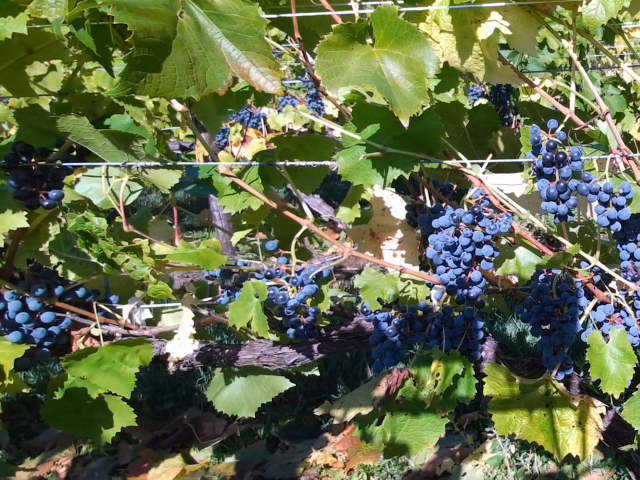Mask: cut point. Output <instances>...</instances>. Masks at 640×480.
<instances>
[{"mask_svg": "<svg viewBox=\"0 0 640 480\" xmlns=\"http://www.w3.org/2000/svg\"><path fill=\"white\" fill-rule=\"evenodd\" d=\"M309 227H310V224L308 222H305L303 225H301L297 229V231H296V233H295V235L293 237V241H292V243L290 244V247H289V254L291 256H294L296 254V249H297V247H298V245L300 243L301 237H302L303 233L309 229Z\"/></svg>", "mask_w": 640, "mask_h": 480, "instance_id": "obj_1", "label": "cut point"}, {"mask_svg": "<svg viewBox=\"0 0 640 480\" xmlns=\"http://www.w3.org/2000/svg\"><path fill=\"white\" fill-rule=\"evenodd\" d=\"M349 258V253L347 251H344L342 253L341 256L339 257H335L333 259H331L328 263L327 266L329 268H332L333 266L337 265V264H342L344 263L347 259Z\"/></svg>", "mask_w": 640, "mask_h": 480, "instance_id": "obj_2", "label": "cut point"}]
</instances>
